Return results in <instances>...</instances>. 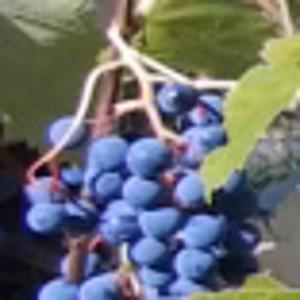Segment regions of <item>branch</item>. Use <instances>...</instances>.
Wrapping results in <instances>:
<instances>
[{
  "label": "branch",
  "mask_w": 300,
  "mask_h": 300,
  "mask_svg": "<svg viewBox=\"0 0 300 300\" xmlns=\"http://www.w3.org/2000/svg\"><path fill=\"white\" fill-rule=\"evenodd\" d=\"M121 71L122 68H117L116 70L106 72L102 79L95 121L93 123V132L99 138L108 136L114 125V109L119 90Z\"/></svg>",
  "instance_id": "30e6481e"
},
{
  "label": "branch",
  "mask_w": 300,
  "mask_h": 300,
  "mask_svg": "<svg viewBox=\"0 0 300 300\" xmlns=\"http://www.w3.org/2000/svg\"><path fill=\"white\" fill-rule=\"evenodd\" d=\"M132 10V0H117L113 22H117L119 24V30L126 43V46L130 37Z\"/></svg>",
  "instance_id": "325d2c04"
},
{
  "label": "branch",
  "mask_w": 300,
  "mask_h": 300,
  "mask_svg": "<svg viewBox=\"0 0 300 300\" xmlns=\"http://www.w3.org/2000/svg\"><path fill=\"white\" fill-rule=\"evenodd\" d=\"M117 58H123L119 51L117 50L113 39H110L109 45L107 47V52H106V60L105 62L111 61L112 59H117Z\"/></svg>",
  "instance_id": "170604dd"
}]
</instances>
